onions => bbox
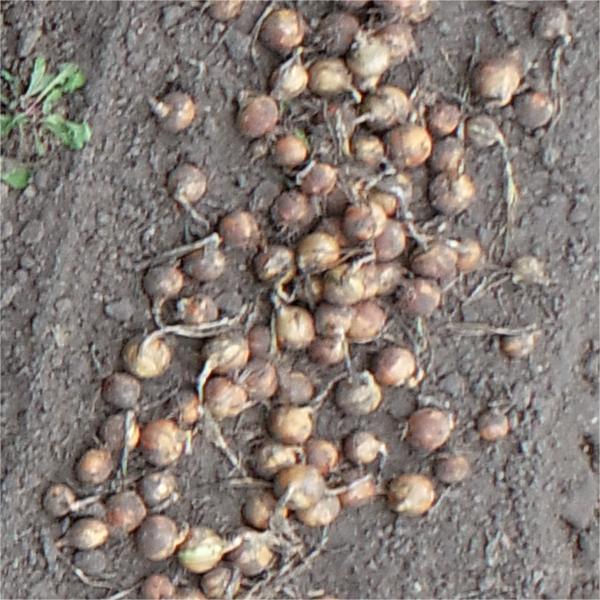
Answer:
[513,90,552,126]
[179,529,221,572]
[99,415,135,453]
[318,102,357,137]
[374,175,409,210]
[204,378,247,419]
[269,402,312,443]
[412,246,455,282]
[274,59,311,96]
[323,269,367,301]
[272,464,326,509]
[168,165,208,203]
[236,94,277,135]
[406,408,450,452]
[365,260,405,296]
[154,90,196,130]
[321,12,361,52]
[103,493,144,531]
[404,0,428,24]
[534,8,567,39]
[299,161,337,198]
[447,169,478,204]
[363,85,409,129]
[430,136,466,175]
[240,360,280,399]
[42,481,75,516]
[178,588,206,600]
[278,366,314,404]
[124,333,171,378]
[142,266,184,303]
[348,300,384,338]
[499,329,528,359]
[253,245,295,284]
[342,472,379,507]
[399,279,439,316]
[351,132,385,165]
[175,395,201,425]
[433,449,468,484]
[74,445,111,483]
[294,231,338,274]
[206,0,243,19]
[139,569,174,599]
[187,251,222,281]
[233,533,273,576]
[272,189,318,233]
[273,306,315,346]
[196,568,241,596]
[135,516,179,559]
[447,234,482,269]
[298,495,340,526]
[347,38,391,80]
[202,334,247,374]
[102,372,139,408]
[246,326,275,355]
[387,470,435,515]
[259,9,302,53]
[179,290,219,325]
[257,439,297,476]
[241,490,275,528]
[271,131,306,166]
[337,374,378,416]
[426,101,462,138]
[372,221,408,259]
[304,439,339,473]
[297,274,325,303]
[473,407,507,441]
[140,469,177,506]
[347,204,386,242]
[140,421,184,465]
[385,122,432,167]
[308,334,344,365]
[464,116,500,151]
[374,25,414,63]
[311,61,352,95]
[69,516,108,551]
[369,344,415,385]
[472,54,522,103]
[316,302,352,338]
[427,171,479,213]
[217,209,263,252]
[347,430,385,464]
[512,253,543,283]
